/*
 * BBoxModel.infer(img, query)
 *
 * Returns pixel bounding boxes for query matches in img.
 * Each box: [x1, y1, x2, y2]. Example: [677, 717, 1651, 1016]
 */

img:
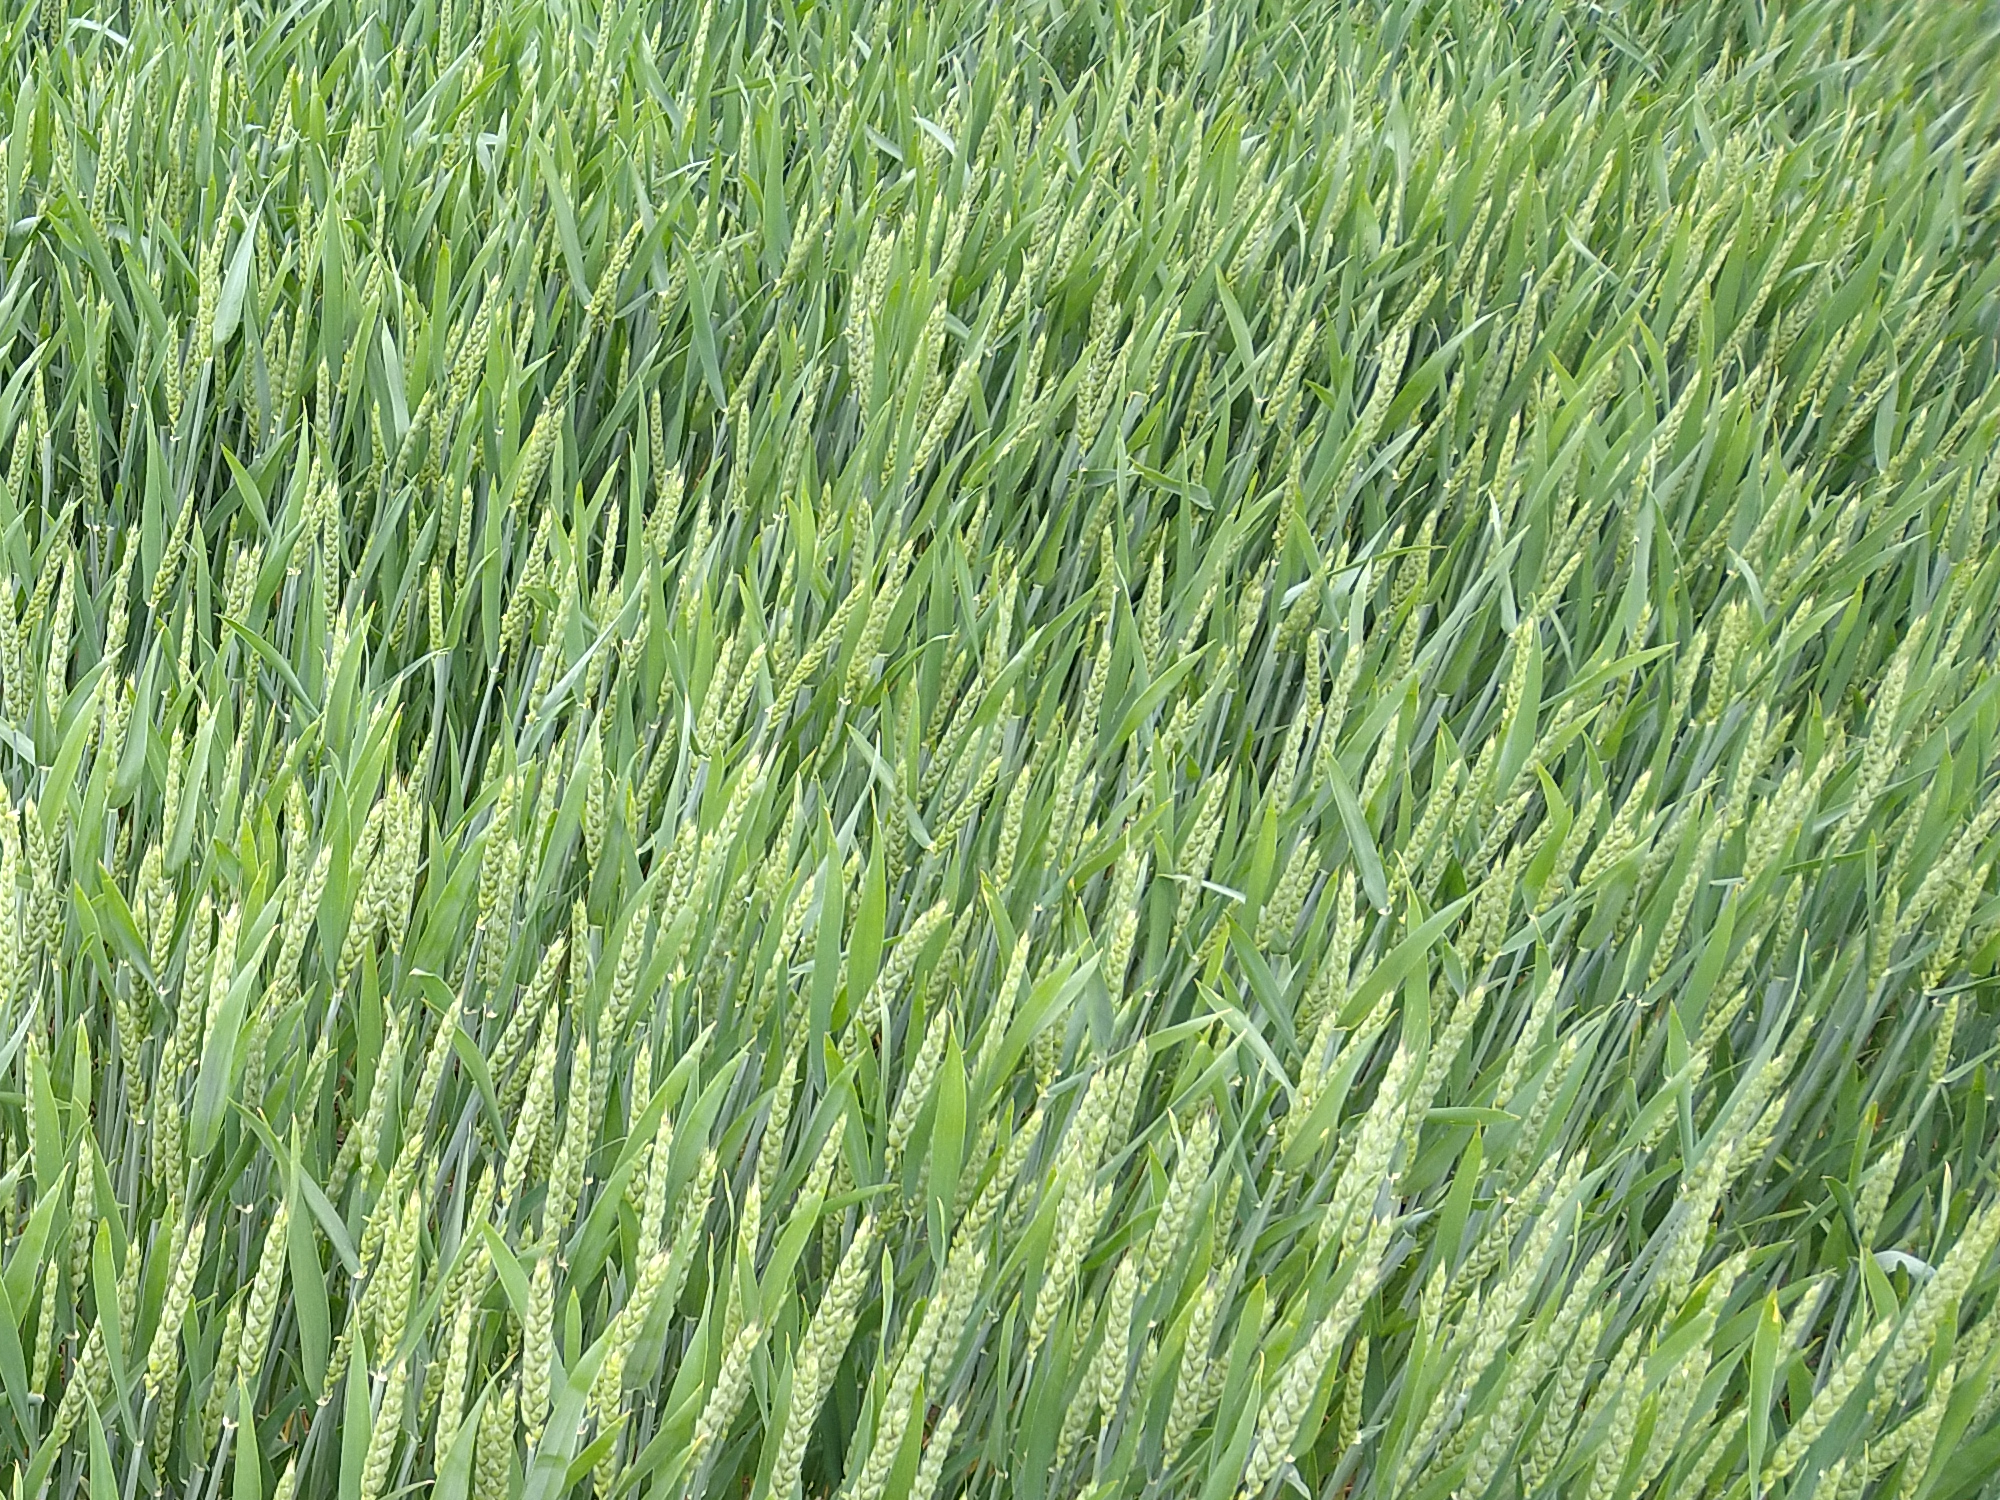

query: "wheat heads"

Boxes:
[1519, 428, 1534, 469]
[1249, 45, 1262, 84]
[1224, 42, 1249, 89]
[795, 1117, 847, 1227]
[687, 1329, 763, 1484]
[1307, 628, 1320, 720]
[234, 8, 254, 97]
[89, 117, 111, 257]
[968, 892, 989, 959]
[859, 313, 878, 423]
[1380, 326, 1398, 381]
[1162, 1293, 1219, 1463]
[723, 651, 766, 737]
[1970, 447, 2000, 530]
[1176, 373, 1204, 452]
[686, 590, 701, 634]
[460, 307, 503, 398]
[909, 1115, 938, 1201]
[846, 274, 862, 400]
[1265, 267, 1283, 337]
[73, 86, 84, 130]
[1667, 276, 1700, 337]
[1837, 620, 1875, 712]
[97, 512, 107, 565]
[1030, 690, 1047, 735]
[591, 1359, 621, 1499]
[1777, 1016, 1816, 1083]
[1898, 787, 1998, 929]
[403, 302, 412, 356]
[1757, 711, 1795, 767]
[1875, 289, 1945, 368]
[1725, 136, 1742, 187]
[992, 570, 1018, 679]
[375, 189, 385, 247]
[199, 25, 205, 62]
[1428, 968, 1457, 1045]
[1255, 1319, 1327, 1431]
[562, 1042, 587, 1215]
[1058, 1077, 1111, 1165]
[813, 1307, 863, 1391]
[1857, 662, 1909, 786]
[117, 999, 140, 1118]
[27, 798, 65, 939]
[1504, 618, 1531, 726]
[1365, 527, 1402, 599]
[188, 558, 197, 594]
[1369, 184, 1389, 225]
[1742, 467, 1805, 563]
[256, 291, 268, 339]
[1882, 260, 1920, 316]
[1832, 176, 1851, 214]
[651, 842, 679, 927]
[1393, 517, 1435, 609]
[437, 475, 451, 572]
[636, 1121, 672, 1266]
[754, 875, 813, 1022]
[1552, 437, 1585, 532]
[924, 650, 968, 743]
[407, 503, 419, 554]
[1228, 151, 1269, 225]
[1276, 559, 1327, 647]
[566, 86, 581, 126]
[1242, 1330, 1341, 1484]
[1328, 873, 1357, 1011]
[1964, 152, 1996, 194]
[1634, 603, 1652, 642]
[1069, 43, 1073, 90]
[1014, 107, 1033, 191]
[1480, 867, 1516, 958]
[1438, 1148, 1552, 1319]
[56, 111, 80, 178]
[829, 1388, 918, 1500]
[239, 1019, 269, 1144]
[882, 1007, 946, 1163]
[27, 107, 37, 159]
[552, 16, 568, 57]
[481, 742, 502, 799]
[353, 469, 379, 527]
[1923, 993, 1959, 1072]
[933, 92, 961, 158]
[658, 478, 685, 550]
[344, 224, 357, 264]
[242, 547, 263, 612]
[404, 803, 423, 901]
[1771, 871, 1801, 968]
[1816, 370, 1876, 456]
[673, 578, 688, 615]
[1323, 176, 1352, 232]
[1097, 53, 1140, 161]
[262, 739, 287, 780]
[120, 398, 132, 455]
[1193, 214, 1209, 265]
[177, 124, 202, 225]
[800, 1219, 880, 1366]
[1560, 129, 1593, 208]
[1793, 282, 1824, 335]
[633, 719, 670, 834]
[460, 64, 470, 97]
[1282, 1010, 1342, 1151]
[543, 1150, 563, 1237]
[1167, 1118, 1220, 1280]
[104, 530, 142, 656]
[1776, 313, 1795, 355]
[512, 409, 549, 499]
[780, 392, 818, 507]
[869, 0, 878, 42]
[1466, 430, 1486, 520]
[1076, 369, 1090, 450]
[1809, 239, 1825, 256]
[761, 1057, 797, 1195]
[845, 1270, 870, 1323]
[497, 1048, 530, 1131]
[225, 75, 237, 133]
[1396, 990, 1484, 1178]
[1046, 208, 1086, 298]
[1450, 362, 1466, 440]
[1316, 467, 1356, 536]
[27, 1041, 42, 1173]
[1903, 275, 1934, 322]
[600, 907, 648, 1039]
[936, 252, 962, 288]
[1488, 197, 1518, 249]
[1383, 187, 1402, 255]
[1448, 200, 1490, 291]
[1627, 1350, 1712, 1497]
[1479, 328, 1515, 421]
[486, 943, 563, 1072]
[207, 46, 224, 144]
[1626, 172, 1638, 224]
[24, 809, 76, 961]
[313, 22, 317, 51]
[1084, 616, 1096, 655]
[980, 628, 992, 680]
[893, 676, 914, 762]
[1609, 348, 1624, 395]
[532, 1003, 560, 1192]
[152, 1040, 186, 1188]
[893, 306, 943, 431]
[1270, 449, 1299, 552]
[1574, 62, 1599, 114]
[0, 580, 23, 718]
[1397, 402, 1454, 481]
[516, 247, 541, 340]
[770, 651, 802, 728]
[1248, 225, 1274, 283]
[539, 173, 571, 248]
[220, 748, 234, 807]
[1003, 262, 1037, 330]
[1278, 0, 1290, 36]
[562, 284, 575, 317]
[779, 979, 812, 1036]
[15, 505, 74, 657]
[406, 1001, 461, 1142]
[145, 1223, 207, 1396]
[1144, 122, 1159, 170]
[819, 1187, 840, 1292]
[1267, 90, 1286, 122]
[719, 929, 761, 1009]
[181, 309, 202, 396]
[283, 789, 309, 935]
[789, 202, 808, 263]
[871, 232, 896, 309]
[179, 603, 196, 686]
[1307, 139, 1345, 225]
[651, 21, 662, 53]
[852, 498, 870, 588]
[1038, 204, 1062, 246]
[1003, 1184, 1037, 1225]
[1683, 190, 1736, 273]
[1703, 47, 1728, 98]
[1188, 110, 1205, 186]
[1613, 634, 1643, 709]
[522, 1260, 554, 1421]
[1493, 412, 1518, 503]
[1320, 1046, 1411, 1238]
[1108, 1041, 1149, 1167]
[1845, 165, 1873, 238]
[245, 341, 257, 437]
[166, 149, 180, 239]
[842, 545, 913, 696]
[1582, 504, 1609, 539]
[278, 325, 290, 366]
[1035, 164, 1068, 241]
[1511, 802, 1564, 868]
[1938, 398, 1980, 453]
[727, 327, 777, 410]
[30, 992, 51, 1059]
[1458, 863, 1498, 950]
[669, 1152, 719, 1304]
[880, 1293, 948, 1437]
[1361, 717, 1399, 812]
[1743, 655, 1763, 713]
[1789, 599, 1812, 641]
[830, 16, 842, 51]
[1535, 781, 1600, 908]
[1652, 1410, 1745, 1500]
[360, 1032, 400, 1182]
[1590, 368, 1610, 404]
[1250, 80, 1266, 117]
[1043, 737, 1078, 855]
[1411, 100, 1452, 190]
[1099, 857, 1122, 922]
[312, 226, 317, 262]
[417, 571, 432, 613]
[121, 153, 134, 189]
[835, 902, 946, 1061]
[1755, 452, 1775, 481]
[1875, 21, 1915, 87]
[39, 0, 53, 26]
[587, 584, 626, 694]
[436, 1304, 472, 1473]
[963, 495, 987, 547]
[1086, 340, 1133, 443]
[474, 807, 513, 919]
[1531, 238, 1569, 293]
[1121, 88, 1154, 174]
[721, 269, 747, 335]
[1532, 49, 1546, 85]
[1947, 506, 1984, 614]
[605, 281, 620, 320]
[429, 409, 444, 475]
[442, 94, 475, 161]
[166, 1218, 188, 1288]
[1426, 85, 1440, 122]
[1881, 809, 1932, 890]
[1319, 988, 1393, 1102]
[111, 76, 137, 175]
[251, 1461, 298, 1500]
[1787, 25, 1830, 85]
[861, 222, 878, 295]
[102, 676, 120, 783]
[161, 729, 185, 839]
[1659, 205, 1684, 255]
[0, 780, 22, 861]
[259, 304, 284, 362]
[1636, 1020, 1658, 1063]
[271, 850, 333, 995]
[154, 890, 179, 971]
[1484, 98, 1501, 141]
[279, 105, 293, 142]
[1449, 1288, 1481, 1351]
[918, 355, 981, 467]
[1817, 752, 1897, 858]
[1055, 1368, 1102, 1471]
[946, 167, 983, 247]
[1407, 146, 1451, 241]
[941, 628, 960, 677]
[633, 135, 646, 188]
[371, 1263, 398, 1337]
[903, 215, 912, 266]
[1518, 1147, 1587, 1266]
[315, 359, 330, 429]
[51, 0, 61, 44]
[856, 169, 865, 207]
[1323, 434, 1375, 500]
[146, 51, 166, 144]
[219, 550, 247, 634]
[593, 0, 617, 64]
[1668, 1142, 1730, 1316]
[404, 329, 415, 395]
[1717, 1100, 1786, 1188]
[1350, 0, 1365, 21]
[1662, 452, 1698, 513]
[204, 909, 243, 1045]
[696, 632, 736, 743]
[96, 66, 102, 94]
[18, 161, 33, 194]
[772, 802, 794, 865]
[970, 936, 1031, 1089]
[1897, 1362, 1952, 1500]
[1527, 551, 1586, 627]
[439, 1169, 495, 1302]
[1192, 1350, 1242, 1429]
[441, 927, 482, 992]
[442, 276, 502, 395]
[530, 170, 543, 220]
[1442, 172, 1457, 212]
[1569, 1329, 1638, 1448]
[154, 491, 194, 593]
[1367, 335, 1409, 424]
[1133, 294, 1145, 334]
[481, 0, 494, 41]
[1713, 606, 1735, 717]
[696, 887, 744, 1018]
[1102, 519, 1112, 618]
[664, 823, 699, 938]
[1793, 324, 1842, 413]
[1141, 556, 1164, 669]
[48, 808, 77, 885]
[1038, 102, 1055, 137]
[1407, 404, 1422, 430]
[1672, 634, 1709, 717]
[1769, 207, 1818, 289]
[117, 678, 135, 747]
[84, 685, 103, 743]
[924, 1254, 998, 1397]
[843, 890, 861, 943]
[1705, 1249, 1749, 1336]
[1031, 704, 1064, 779]
[900, 1407, 958, 1500]
[296, 192, 310, 279]
[550, 220, 563, 257]
[35, 371, 47, 433]
[486, 847, 522, 988]
[686, 492, 710, 567]
[642, 463, 680, 542]
[1547, 704, 1573, 770]
[1760, 12, 1787, 100]
[468, 0, 479, 38]
[418, 1324, 452, 1417]
[1321, 1111, 1364, 1166]
[1731, 704, 1768, 825]
[429, 566, 445, 653]
[453, 484, 472, 584]
[1446, 449, 1473, 507]
[650, 136, 665, 204]
[1203, 229, 1224, 270]
[1543, 313, 1583, 390]
[241, 638, 259, 703]
[1156, 98, 1176, 165]
[309, 482, 332, 540]
[1415, 1415, 1479, 1484]
[767, 1359, 822, 1500]
[404, 144, 412, 174]
[1653, 1355, 1685, 1415]
[1089, 249, 1132, 337]
[1189, 188, 1211, 251]
[1766, 1320, 1892, 1476]
[568, 710, 582, 776]
[1647, 1233, 1677, 1301]
[1233, 579, 1266, 646]
[241, 698, 256, 755]
[1349, 951, 1379, 1001]
[0, 840, 16, 1003]
[468, 64, 485, 98]
[719, 618, 751, 713]
[421, 390, 463, 479]
[1781, 1461, 1833, 1500]
[716, 767, 758, 857]
[589, 217, 643, 314]
[1181, 580, 1215, 658]
[585, 731, 604, 864]
[465, 56, 481, 75]
[210, 280, 228, 400]
[1106, 912, 1140, 1012]
[389, 588, 411, 648]
[1203, 348, 1212, 381]
[445, 321, 466, 368]
[1776, 1278, 1826, 1362]
[1458, 1351, 1536, 1500]
[922, 904, 971, 1012]
[1473, 125, 1516, 214]
[1000, 764, 1030, 893]
[833, 960, 848, 1013]
[778, 555, 795, 596]
[1395, 607, 1425, 684]
[299, 1042, 330, 1137]
[1078, 1183, 1113, 1268]
[287, 455, 320, 563]
[1097, 210, 1124, 263]
[624, 1046, 653, 1214]
[816, 483, 831, 528]
[1940, 464, 1967, 557]
[1737, 54, 1754, 101]
[839, 853, 858, 896]
[499, 1055, 554, 1201]
[1691, 1406, 1718, 1432]
[1959, 1320, 1987, 1369]
[13, 950, 37, 1024]
[695, 194, 710, 224]
[888, 764, 906, 887]
[978, 69, 1019, 158]
[821, 101, 853, 194]
[595, 1260, 669, 1382]
[1187, 451, 1204, 520]
[1845, 1168, 1878, 1229]
[1149, 488, 1166, 513]
[1125, 530, 1159, 581]
[1836, 1306, 1874, 1359]
[1506, 743, 1538, 805]
[814, 715, 833, 766]
[531, 567, 579, 707]
[388, 48, 405, 114]
[1894, 620, 1926, 678]
[1540, 505, 1591, 576]
[1499, 968, 1563, 1107]
[1211, 1020, 1230, 1056]
[350, 802, 383, 867]
[652, 390, 664, 497]
[1938, 610, 1973, 668]
[1820, 313, 1862, 407]
[1417, 1258, 1448, 1340]
[935, 732, 979, 837]
[92, 1240, 142, 1400]
[1655, 148, 1681, 201]
[1737, 600, 1750, 636]
[1706, 222, 1740, 282]
[179, 897, 216, 1060]
[1185, 18, 1209, 69]
[989, 687, 1014, 756]
[320, 1115, 358, 1206]
[1103, 1065, 1124, 1115]
[585, 1012, 614, 1159]
[1656, 372, 1700, 461]
[1644, 821, 1717, 986]
[555, 1484, 563, 1487]
[49, 1318, 97, 1442]
[580, 194, 596, 222]
[1396, 1324, 1510, 1483]
[1893, 410, 1927, 480]
[1700, 935, 1759, 1029]
[1139, 1122, 1214, 1293]
[1641, 1056, 1703, 1146]
[29, 1260, 58, 1403]
[765, 846, 792, 907]
[169, 78, 193, 148]
[1092, 157, 1111, 194]
[593, 502, 622, 605]
[1256, 322, 1316, 440]
[75, 402, 96, 523]
[1670, 628, 1701, 690]
[1971, 160, 1996, 207]
[418, 1158, 438, 1224]
[1866, 469, 1891, 535]
[1269, 394, 1299, 477]
[733, 398, 750, 497]
[1566, 1366, 1647, 1500]
[879, 428, 914, 482]
[1197, 904, 1241, 958]
[552, 533, 577, 590]
[43, 552, 75, 717]
[1738, 795, 1776, 848]
[1881, 526, 1906, 579]
[223, 515, 239, 588]
[653, 219, 708, 323]
[798, 8, 811, 44]
[1028, 644, 1047, 675]
[365, 257, 382, 305]
[337, 116, 362, 176]
[1064, 774, 1098, 874]
[1764, 558, 1789, 596]
[6, 1137, 19, 1237]
[1469, 36, 1492, 82]
[1028, 1193, 1097, 1350]
[1681, 498, 1740, 581]
[508, 616, 524, 676]
[1396, 280, 1418, 319]
[784, 1011, 812, 1068]
[372, 402, 390, 473]
[1186, 691, 1212, 729]
[1249, 837, 1310, 949]
[472, 1387, 517, 1500]
[360, 1133, 425, 1274]
[1270, 702, 1308, 813]
[1556, 234, 1578, 304]
[1615, 450, 1650, 565]
[1675, 249, 1700, 300]
[1053, 1121, 1112, 1251]
[112, 825, 131, 890]
[1213, 646, 1225, 677]
[727, 325, 748, 358]
[1582, 771, 1651, 881]
[1735, 770, 1802, 878]
[1765, 757, 1829, 867]
[1282, 81, 1299, 122]
[1385, 757, 1461, 899]
[1512, 293, 1536, 379]
[780, 605, 794, 643]
[1464, 0, 1482, 30]
[1150, 702, 1189, 770]
[722, 1184, 760, 1355]
[1196, 397, 1211, 428]
[1698, 159, 1715, 196]
[1523, 363, 1538, 427]
[419, 176, 435, 227]
[285, 305, 307, 400]
[984, 298, 1001, 349]
[68, 1138, 93, 1284]
[392, 392, 435, 487]
[1033, 1026, 1049, 1086]
[340, 352, 354, 400]
[1758, 314, 1780, 402]
[1499, 1038, 1579, 1184]
[950, 529, 985, 590]
[1069, 1296, 1098, 1377]
[60, 294, 69, 324]
[1260, 289, 1304, 391]
[1832, 495, 1861, 554]
[935, 764, 1000, 848]
[1684, 459, 1727, 559]
[1312, 647, 1362, 788]
[1520, 1314, 1601, 1495]
[129, 960, 155, 1045]
[736, 114, 750, 200]
[1468, 252, 1487, 306]
[1208, 1173, 1245, 1267]
[357, 0, 364, 27]
[336, 866, 385, 985]
[980, 12, 989, 59]
[110, 611, 130, 668]
[1694, 990, 1746, 1058]
[257, 222, 268, 289]
[1712, 283, 1771, 372]
[1483, 486, 1524, 572]
[344, 135, 364, 214]
[40, 170, 62, 208]
[1273, 855, 1321, 957]
[918, 681, 981, 801]
[883, 192, 905, 225]
[597, 618, 650, 733]
[386, 774, 409, 949]
[1867, 1141, 1903, 1248]
[1522, 112, 1545, 146]
[1294, 974, 1332, 1026]
[1294, 598, 1321, 639]
[527, 761, 559, 896]
[1835, 374, 1893, 450]
[824, 100, 836, 141]
[1082, 640, 1112, 756]
[1697, 1088, 1717, 1133]
[325, 1260, 388, 1382]
[616, 345, 631, 407]
[979, 556, 1013, 606]
[693, 374, 706, 412]
[133, 843, 169, 935]
[139, 104, 151, 198]
[552, 334, 590, 398]
[164, 1105, 184, 1207]
[1087, 302, 1117, 409]
[597, 66, 613, 109]
[1462, 793, 1531, 887]
[1419, 735, 1497, 913]
[1304, 69, 1333, 128]
[1869, 892, 1896, 982]
[383, 1199, 425, 1359]
[1875, 1192, 2000, 1398]
[267, 62, 297, 144]
[1751, 556, 1764, 577]
[575, 61, 603, 154]
[950, 1110, 1046, 1256]
[1082, 482, 1116, 557]
[839, 1146, 850, 1190]
[321, 484, 339, 626]
[165, 316, 181, 418]
[96, 300, 104, 384]
[786, 210, 830, 277]
[1841, 7, 1855, 62]
[152, 1375, 174, 1477]
[1224, 180, 1276, 290]
[1127, 734, 1136, 803]
[41, 284, 54, 331]
[1317, 21, 1334, 62]
[1028, 955, 1056, 995]
[1380, 270, 1411, 323]
[1577, 159, 1612, 227]
[1177, 775, 1228, 871]
[1124, 196, 1137, 234]
[438, 0, 454, 76]
[467, 1218, 505, 1301]
[1096, 1263, 1139, 1420]
[688, 1, 713, 106]
[1118, 856, 1141, 910]
[1047, 135, 1061, 179]
[571, 907, 589, 1038]
[1358, 56, 1391, 107]
[237, 1204, 285, 1385]
[1634, 779, 1709, 898]
[195, 698, 207, 743]
[1604, 872, 1640, 945]
[322, 607, 350, 733]
[477, 159, 486, 194]
[806, 584, 866, 666]
[1686, 1059, 1784, 1191]
[128, 0, 140, 29]
[4, 420, 31, 505]
[357, 1366, 403, 1500]
[198, 1309, 238, 1448]
[1407, 125, 1426, 166]
[245, 143, 259, 171]
[0, 142, 6, 244]
[925, 192, 944, 257]
[153, 160, 164, 203]
[1910, 341, 1942, 390]
[1922, 862, 1991, 984]
[1686, 307, 1700, 359]
[694, 838, 719, 881]
[406, 729, 436, 807]
[332, 79, 347, 119]
[1148, 308, 1182, 390]
[521, 411, 565, 514]
[1398, 276, 1442, 334]
[1310, 235, 1323, 279]
[513, 307, 533, 380]
[137, 282, 161, 384]
[212, 175, 240, 261]
[496, 509, 555, 649]
[1342, 1336, 1371, 1443]
[200, 244, 213, 355]
[657, 641, 679, 710]
[1168, 839, 1214, 940]
[1534, 1247, 1610, 1384]
[1477, 315, 1503, 406]
[1095, 262, 1118, 333]
[1015, 335, 1047, 420]
[1364, 611, 1389, 653]
[976, 219, 996, 256]
[1331, 1217, 1395, 1322]
[1875, 790, 1923, 860]
[267, 357, 282, 420]
[1828, 1406, 1944, 1500]
[770, 641, 795, 675]
[1646, 0, 1661, 34]
[1756, 148, 1784, 221]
